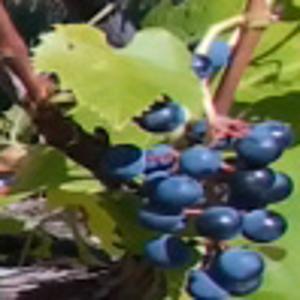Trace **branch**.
Instances as JSON below:
<instances>
[{
  "label": "branch",
  "mask_w": 300,
  "mask_h": 300,
  "mask_svg": "<svg viewBox=\"0 0 300 300\" xmlns=\"http://www.w3.org/2000/svg\"><path fill=\"white\" fill-rule=\"evenodd\" d=\"M0 56L22 82L18 88V106L26 110L42 135L87 170H97L108 142L107 132L98 129L88 135L65 118L54 102L56 83L32 62L27 41L5 2H0Z\"/></svg>",
  "instance_id": "obj_1"
},
{
  "label": "branch",
  "mask_w": 300,
  "mask_h": 300,
  "mask_svg": "<svg viewBox=\"0 0 300 300\" xmlns=\"http://www.w3.org/2000/svg\"><path fill=\"white\" fill-rule=\"evenodd\" d=\"M246 22L243 32L234 47V61L226 70L213 99L217 114L224 115L249 66V59L254 55L260 37L268 27L270 16L269 0H247L244 8Z\"/></svg>",
  "instance_id": "obj_2"
}]
</instances>
